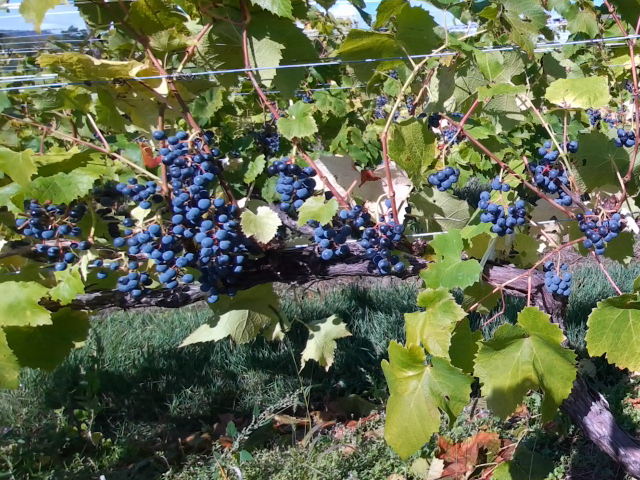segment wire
<instances>
[{"mask_svg":"<svg viewBox=\"0 0 640 480\" xmlns=\"http://www.w3.org/2000/svg\"><path fill=\"white\" fill-rule=\"evenodd\" d=\"M405 54H393V55H374V56H366L355 59H338V60H327V61H319L312 63H304L300 65H255V66H239V67H231L225 69H214V70H203V71H194V72H165L158 74H150L144 76H124L118 78H106V79H97V80H76V81H65L61 83H53V84H25V85H14L11 87H0V92H13L16 90H27V89H55V88H64L67 86H78V85H100V84H108V83H120L126 81H146L167 77H196V76H205V75H216V74H227L233 72H241V71H257V70H302L306 68H314L321 66H329V65H340V64H357L368 61H376V60H395V59H405Z\"/></svg>","mask_w":640,"mask_h":480,"instance_id":"obj_1","label":"wire"},{"mask_svg":"<svg viewBox=\"0 0 640 480\" xmlns=\"http://www.w3.org/2000/svg\"><path fill=\"white\" fill-rule=\"evenodd\" d=\"M523 46L522 45H514V46H507V47H502V48H492V47H483L482 48V52L483 53H504V52H509V51H516V50H522Z\"/></svg>","mask_w":640,"mask_h":480,"instance_id":"obj_4","label":"wire"},{"mask_svg":"<svg viewBox=\"0 0 640 480\" xmlns=\"http://www.w3.org/2000/svg\"><path fill=\"white\" fill-rule=\"evenodd\" d=\"M621 38H640V33H619L613 36H606L601 38H588V39H579V40H564V41H554V42H540L537 44V48L541 49L542 47H557V46H566V45H581V44H590V43H603L609 41H615Z\"/></svg>","mask_w":640,"mask_h":480,"instance_id":"obj_2","label":"wire"},{"mask_svg":"<svg viewBox=\"0 0 640 480\" xmlns=\"http://www.w3.org/2000/svg\"><path fill=\"white\" fill-rule=\"evenodd\" d=\"M441 234L449 235L450 231L447 229H439V230H434L429 232H410L407 234V236L408 237H431V236H436Z\"/></svg>","mask_w":640,"mask_h":480,"instance_id":"obj_3","label":"wire"},{"mask_svg":"<svg viewBox=\"0 0 640 480\" xmlns=\"http://www.w3.org/2000/svg\"><path fill=\"white\" fill-rule=\"evenodd\" d=\"M577 220H578L577 216H569V217H563V218H546L542 220H537L536 224L544 225L548 223H565V222H571V221H577Z\"/></svg>","mask_w":640,"mask_h":480,"instance_id":"obj_5","label":"wire"}]
</instances>
